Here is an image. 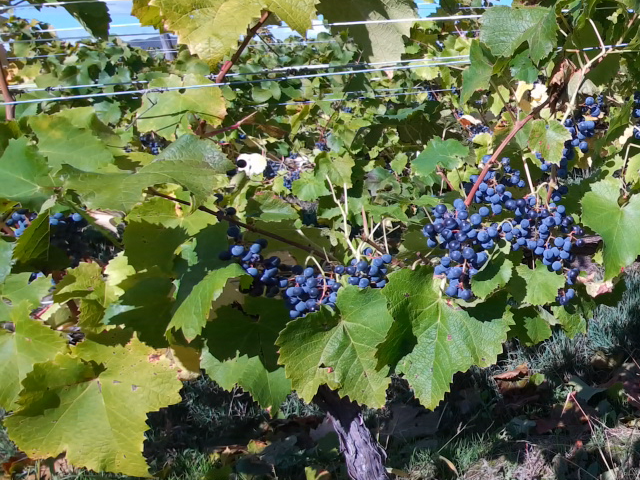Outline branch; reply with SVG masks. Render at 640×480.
<instances>
[{"mask_svg": "<svg viewBox=\"0 0 640 480\" xmlns=\"http://www.w3.org/2000/svg\"><path fill=\"white\" fill-rule=\"evenodd\" d=\"M198 210L201 211V212H204L206 214H209V215H211L213 217H216V218H218L220 220H223L225 222H229V223H231L233 225H236V226H238L240 228H243V229H246L248 231H251L253 233H259L260 235L266 236L268 238H271V239H274V240H278L280 242H284V243H287V244H291V245H293V246H295V247H297V248H299L301 250H305L307 252H310V253H312V254H314L317 257H320L322 259L326 258V255L323 252H320V251H318L317 249H315L313 247H310V246H307V245H303L302 243H300V242H298L296 240H293V239H290V238H286V237H283V236H280V235H276L274 233L265 231V230L260 229V228H256V227L251 226L249 224H245V223H243V222H241L239 220H236L234 218L225 216V215L220 214V213H218L216 211H213L212 209H208V208H206L204 206H199Z\"/></svg>", "mask_w": 640, "mask_h": 480, "instance_id": "branch-1", "label": "branch"}, {"mask_svg": "<svg viewBox=\"0 0 640 480\" xmlns=\"http://www.w3.org/2000/svg\"><path fill=\"white\" fill-rule=\"evenodd\" d=\"M147 194L148 195L158 196V197H161L162 199H165L167 201L174 202V203H177V204L187 205V206L191 205V202L189 200H184V199L172 197V196H169V195H167V194H165V193H163L161 191L148 190Z\"/></svg>", "mask_w": 640, "mask_h": 480, "instance_id": "branch-5", "label": "branch"}, {"mask_svg": "<svg viewBox=\"0 0 640 480\" xmlns=\"http://www.w3.org/2000/svg\"><path fill=\"white\" fill-rule=\"evenodd\" d=\"M550 101L549 100H543L529 115L526 116V118L524 119V121L520 122L519 124L516 125V127L510 132L509 135L506 136V138L504 139V141L502 142V144L500 145V147L494 152V154L489 158L488 162L485 164L483 170L481 171L479 177L477 178V180L475 181V183L473 184L471 190L469 191V194L466 197L465 200V204L469 205L471 203V200L477 190V188L479 187V185L481 184V182L483 181L485 175L487 174L488 170L490 169V167L493 165L494 161L499 157V155L503 152V150L506 148V146L508 145L509 141L513 139V137L520 131L521 128L525 127L526 125L529 124V122L546 106L549 105Z\"/></svg>", "mask_w": 640, "mask_h": 480, "instance_id": "branch-2", "label": "branch"}, {"mask_svg": "<svg viewBox=\"0 0 640 480\" xmlns=\"http://www.w3.org/2000/svg\"><path fill=\"white\" fill-rule=\"evenodd\" d=\"M555 172H556V168L552 167L550 170V180H549V187L547 190V195L545 197L544 200V204L548 205L550 203L551 197H552V192L554 189V182H555Z\"/></svg>", "mask_w": 640, "mask_h": 480, "instance_id": "branch-6", "label": "branch"}, {"mask_svg": "<svg viewBox=\"0 0 640 480\" xmlns=\"http://www.w3.org/2000/svg\"><path fill=\"white\" fill-rule=\"evenodd\" d=\"M0 87H1V90H2V95L4 97V101H12V100H14V96L12 95V93H11L9 87H8L7 81L5 79V73H4L2 65H0Z\"/></svg>", "mask_w": 640, "mask_h": 480, "instance_id": "branch-4", "label": "branch"}, {"mask_svg": "<svg viewBox=\"0 0 640 480\" xmlns=\"http://www.w3.org/2000/svg\"><path fill=\"white\" fill-rule=\"evenodd\" d=\"M271 11L270 10H266L265 13L263 14V16L259 19V21L251 28V30L246 34L244 40L241 42V44L238 46V48L236 49V51L234 52V54L229 58V60L225 63L223 69L221 70V72L219 73V77L216 79L217 83H220L222 81V79L225 77V74L229 72L230 68L233 66V64L235 63V61L237 60V58L242 54V52L245 50V46L248 44L250 38L255 34L256 30L259 29L260 25H263V23L267 20V18L270 16Z\"/></svg>", "mask_w": 640, "mask_h": 480, "instance_id": "branch-3", "label": "branch"}, {"mask_svg": "<svg viewBox=\"0 0 640 480\" xmlns=\"http://www.w3.org/2000/svg\"><path fill=\"white\" fill-rule=\"evenodd\" d=\"M361 238L365 240L368 244H370L380 255H385L386 251L383 250L376 242H374L370 237L366 234H362Z\"/></svg>", "mask_w": 640, "mask_h": 480, "instance_id": "branch-7", "label": "branch"}]
</instances>
